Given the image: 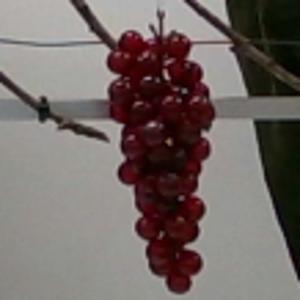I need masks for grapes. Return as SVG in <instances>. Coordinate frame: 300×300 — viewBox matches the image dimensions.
Here are the masks:
<instances>
[{
	"instance_id": "obj_1",
	"label": "grapes",
	"mask_w": 300,
	"mask_h": 300,
	"mask_svg": "<svg viewBox=\"0 0 300 300\" xmlns=\"http://www.w3.org/2000/svg\"><path fill=\"white\" fill-rule=\"evenodd\" d=\"M192 43L182 33L161 42L143 40L135 29L121 32L105 59L111 79L109 114L125 124L116 169L119 183L134 190V207L143 216L138 237L149 241L150 273L163 277L165 289L188 293L191 275L202 273L204 256L186 245L198 242L208 204L197 195L203 164L213 154L209 131L217 115L202 66L188 59Z\"/></svg>"
}]
</instances>
